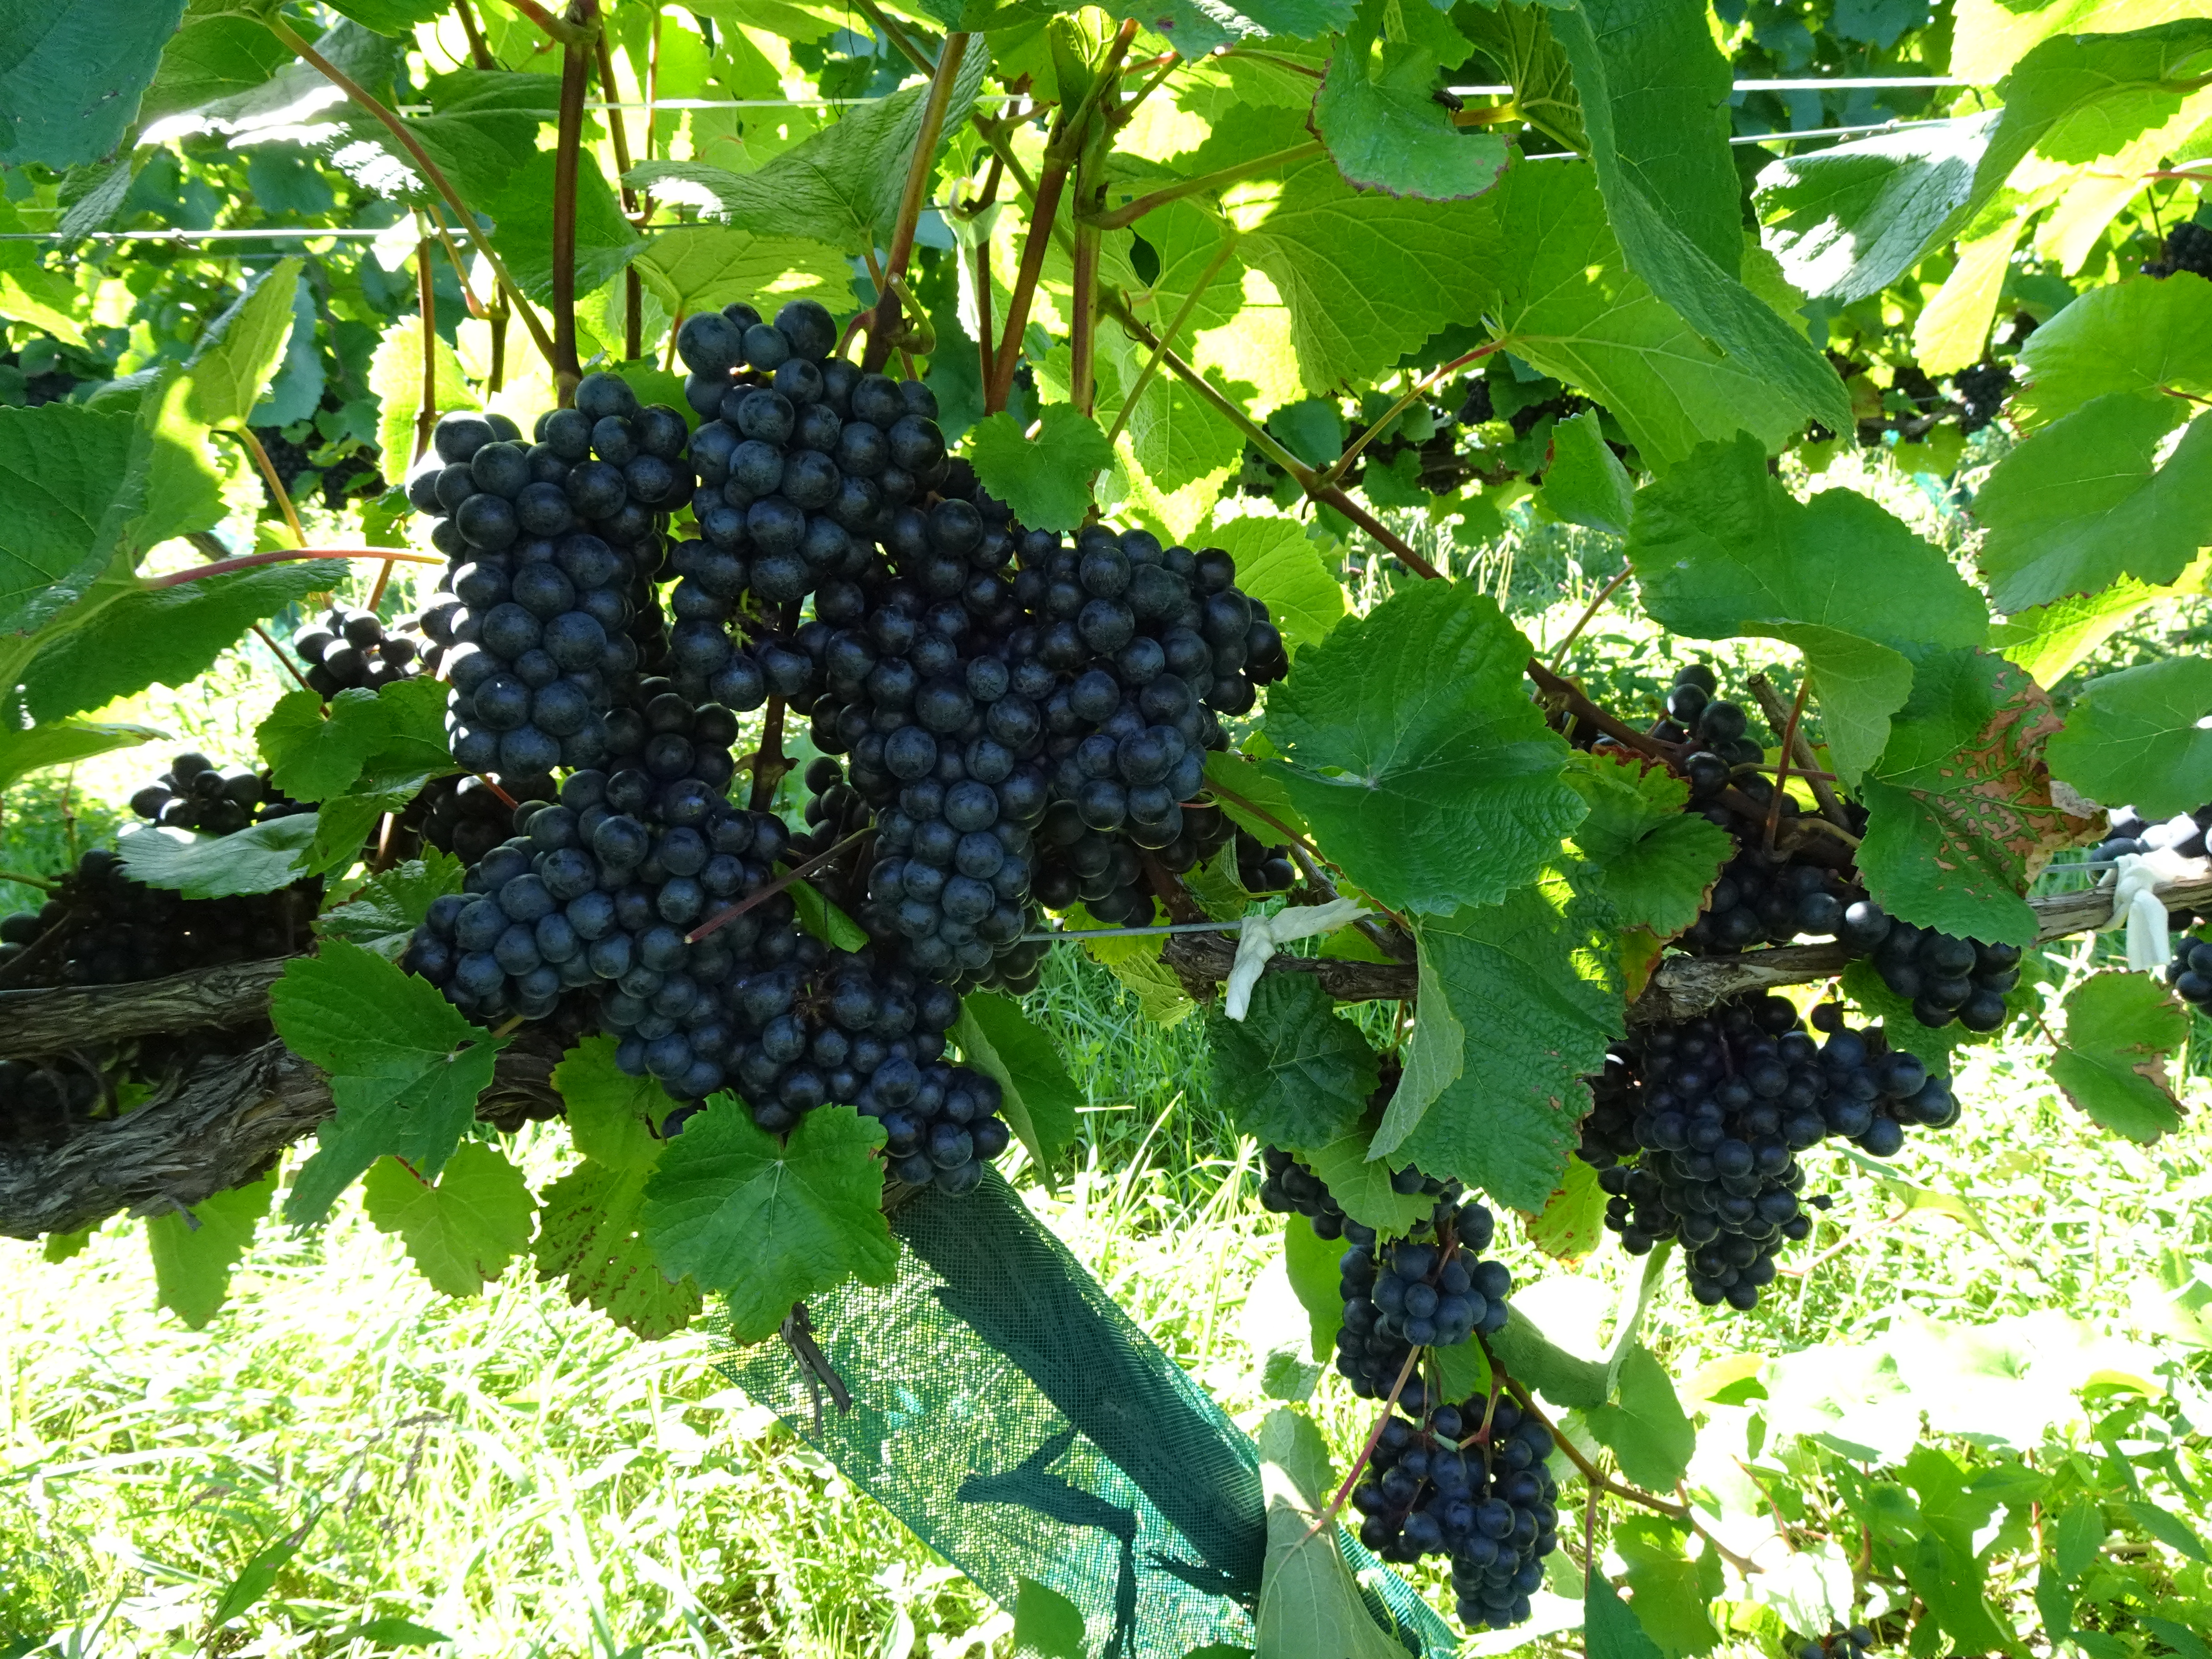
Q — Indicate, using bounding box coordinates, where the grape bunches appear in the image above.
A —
[293,609,416,703]
[1781,864,2023,1033]
[1336,1217,1424,1401]
[137,1018,274,1087]
[1030,798,1157,929]
[2085,802,2212,933]
[720,935,960,1134]
[853,456,1020,655]
[0,851,324,990]
[1575,1042,1681,1255]
[403,771,624,1019]
[1622,987,1827,1310]
[586,767,796,1102]
[1372,1202,1510,1349]
[1153,798,1237,872]
[1010,523,1290,849]
[785,580,1056,984]
[2165,937,2212,1017]
[870,1060,1009,1197]
[789,756,875,865]
[604,676,738,798]
[1235,830,1295,903]
[130,753,324,836]
[1389,1162,1463,1235]
[1260,1142,1345,1240]
[1811,1003,1961,1157]
[1424,1392,1559,1630]
[424,773,557,869]
[659,298,951,710]
[951,903,1053,997]
[1593,665,1802,956]
[360,790,431,874]
[410,371,697,781]
[0,1037,139,1149]
[1352,1380,1467,1564]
